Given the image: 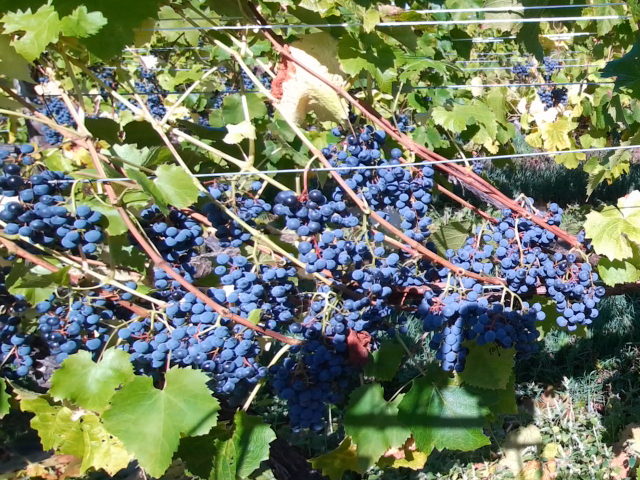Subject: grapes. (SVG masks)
<instances>
[{
	"mask_svg": "<svg viewBox=\"0 0 640 480\" xmlns=\"http://www.w3.org/2000/svg\"><path fill=\"white\" fill-rule=\"evenodd\" d=\"M154 291L167 297L166 312L176 327L172 333L162 321L153 325L155 335L148 339L138 338L129 345H118V350L129 352L130 361H149L151 366L164 365L168 351L173 362L184 365L197 364L211 378L209 388L217 395L230 393L245 378L255 384L268 374L265 365L254 357L260 352V345L252 329L237 323L233 327L235 335L228 334L226 325L215 328L203 340L204 329L217 320V311L193 292L181 289V285L161 269L153 268ZM218 353L216 354V355H214V356H213V358H208V356H207V355L212 354V353H214V352H216L217 350H219V351H218Z\"/></svg>",
	"mask_w": 640,
	"mask_h": 480,
	"instance_id": "1",
	"label": "grapes"
},
{
	"mask_svg": "<svg viewBox=\"0 0 640 480\" xmlns=\"http://www.w3.org/2000/svg\"><path fill=\"white\" fill-rule=\"evenodd\" d=\"M499 223L493 227V235L485 232L481 238L485 242L493 240L499 246L496 256L502 262L500 272L511 281L509 288L518 294L527 293L530 286L539 281V276H545L546 292L556 300V309L562 313L557 318V324L576 332L579 325H591L599 316V310L594 306L606 294L603 286L592 285L598 279V274L592 271L589 263L579 264L577 256L569 253L564 259L561 252L550 255L541 247L534 244H551L556 236L548 234L531 220L522 217L518 223L524 232L522 247L525 268H515L519 264L520 249L516 245H507L515 237L513 232V213L503 208L501 216L496 218ZM568 269L573 278L567 283L561 281Z\"/></svg>",
	"mask_w": 640,
	"mask_h": 480,
	"instance_id": "2",
	"label": "grapes"
},
{
	"mask_svg": "<svg viewBox=\"0 0 640 480\" xmlns=\"http://www.w3.org/2000/svg\"><path fill=\"white\" fill-rule=\"evenodd\" d=\"M460 283L470 292L465 295L466 300H459L461 295L453 293L443 300V312L433 315L428 308L434 295L432 290L422 292V301L419 313L425 317L423 320L426 332L435 331L442 324V332L429 339L432 350L438 359H442L441 367L444 370H462L468 359V349L460 345L463 339L476 340L480 345L490 343L495 338L506 350L514 348V342H520V347L526 352L538 351L540 344L535 339L540 337V332L535 322H543L545 313L540 302L529 305L522 304L524 312L511 311L509 306L503 308L500 301H493L489 305L486 298L477 295L484 291V285L478 283L475 278H462Z\"/></svg>",
	"mask_w": 640,
	"mask_h": 480,
	"instance_id": "3",
	"label": "grapes"
},
{
	"mask_svg": "<svg viewBox=\"0 0 640 480\" xmlns=\"http://www.w3.org/2000/svg\"><path fill=\"white\" fill-rule=\"evenodd\" d=\"M10 156L8 149L0 151V167H4V174L0 175V188L5 196H11L18 191V196L23 203L38 201L32 210H27L23 204L7 202L4 211L0 213V220L5 223V232L20 236H28L31 244H50L56 238L62 248L74 249L78 242L82 245L83 254H94L97 251L96 243L106 238V233L101 232L102 227L95 225L101 220L99 211H92L89 205H79L76 215L81 217L76 220L67 216L65 208H56L64 202L62 195H50L49 186L42 184V179L63 180V171H48L41 169L39 173H33L29 182L33 189L21 188V166L19 164H6Z\"/></svg>",
	"mask_w": 640,
	"mask_h": 480,
	"instance_id": "4",
	"label": "grapes"
},
{
	"mask_svg": "<svg viewBox=\"0 0 640 480\" xmlns=\"http://www.w3.org/2000/svg\"><path fill=\"white\" fill-rule=\"evenodd\" d=\"M345 194L339 186L330 194V199L322 192L313 188L309 191L308 199L300 204L291 190H284L272 199L273 207L264 198L246 199L243 196H236L234 202L238 205L236 214L242 219L249 221L258 214L268 211L277 216L284 214L285 227L289 231H297L299 237H308L312 234L324 233L317 241L321 251L320 257L316 253L310 252L314 248L311 240H302L298 244L299 260L305 263V270L309 273H316L325 269L335 271L339 265H349L351 261L360 265L362 257L367 251V246L363 240L348 241L343 238V232L334 229L326 232V222L333 225H345L346 227L357 226L360 218L347 210V205L342 201Z\"/></svg>",
	"mask_w": 640,
	"mask_h": 480,
	"instance_id": "5",
	"label": "grapes"
},
{
	"mask_svg": "<svg viewBox=\"0 0 640 480\" xmlns=\"http://www.w3.org/2000/svg\"><path fill=\"white\" fill-rule=\"evenodd\" d=\"M341 176H347L346 184L351 189L365 187L367 191H359L357 196L365 198L368 206L376 211L385 221H389L391 215L383 211V206L393 205L399 214L405 218L400 222L404 234L414 240L422 241L431 236L430 225L432 219L424 216L428 212V205L431 203V195L426 191L433 189L435 181L434 166L423 167L420 178L412 177L410 169H377L379 182L374 183L368 180L372 176L371 170H347L337 171ZM417 201L412 210L409 202L411 192Z\"/></svg>",
	"mask_w": 640,
	"mask_h": 480,
	"instance_id": "6",
	"label": "grapes"
},
{
	"mask_svg": "<svg viewBox=\"0 0 640 480\" xmlns=\"http://www.w3.org/2000/svg\"><path fill=\"white\" fill-rule=\"evenodd\" d=\"M375 269L369 268L366 272L360 268H355L351 273V279L354 282L359 281L361 287H357L355 292L359 295H365L368 290L372 294H376L378 299L374 306L370 307L363 314L360 310L371 303L369 297H363L358 302L351 298L344 300V306L349 310V314L335 311L333 317L327 324L326 333L332 337V348L336 352H345L348 349V332L354 330L360 332L362 329L374 331L378 322H381L386 315L394 312L392 306H382L383 302L391 295L393 289L386 285L382 287L384 282H392L395 286L401 287H424L426 278L416 274V267L401 264V257L396 253H388L384 259L378 261Z\"/></svg>",
	"mask_w": 640,
	"mask_h": 480,
	"instance_id": "7",
	"label": "grapes"
},
{
	"mask_svg": "<svg viewBox=\"0 0 640 480\" xmlns=\"http://www.w3.org/2000/svg\"><path fill=\"white\" fill-rule=\"evenodd\" d=\"M55 298L54 294H50L47 299L39 300L35 306V313L42 315L51 308V303ZM85 297L80 301H75L71 305V312H68L66 306H58L55 308L54 314L42 315L39 319L40 334L44 341L50 346V352L55 356L57 363H63L71 354H75L80 349L92 351V361L96 362L98 356L104 348L105 341L109 339L110 328L108 326H99L98 322L102 319H111L113 317L112 309H105L98 314L94 313V307H104L106 300L104 298H96L92 300V305H83L86 303ZM66 316L71 325L67 327V334L58 331L65 325ZM97 331L99 338L91 339L85 342L80 336L82 331Z\"/></svg>",
	"mask_w": 640,
	"mask_h": 480,
	"instance_id": "8",
	"label": "grapes"
},
{
	"mask_svg": "<svg viewBox=\"0 0 640 480\" xmlns=\"http://www.w3.org/2000/svg\"><path fill=\"white\" fill-rule=\"evenodd\" d=\"M230 262V256L227 253H221L216 258L219 265L214 269V273L220 277L222 285H234L235 292H230L227 296L225 289L211 288L208 296L219 304L226 303L227 307L240 314L248 317L253 309H262L264 315L259 319L261 324L274 330L276 322L279 320L291 321L295 317L292 308L286 307L284 301L287 298V292L293 288V284L289 281L282 285L271 284L268 287L267 299L261 298L265 291L262 284H255L258 276L255 273H244V267L248 264L245 256H233L231 258L232 265L237 269L230 271L226 265Z\"/></svg>",
	"mask_w": 640,
	"mask_h": 480,
	"instance_id": "9",
	"label": "grapes"
},
{
	"mask_svg": "<svg viewBox=\"0 0 640 480\" xmlns=\"http://www.w3.org/2000/svg\"><path fill=\"white\" fill-rule=\"evenodd\" d=\"M172 222L176 223L178 227L185 228L179 229L177 227H168L166 221H155L151 232L158 234L159 232L164 234L165 237L160 238L156 243L158 251L162 252V256L167 261L178 262L182 264L179 267H175L174 270L180 275L184 273V279L188 282H194V275L198 272V267L190 265V258L197 257L199 252L193 250L192 247H200L204 243L202 236L203 228L198 224L197 220L193 216H187L186 213L180 210H174L170 214Z\"/></svg>",
	"mask_w": 640,
	"mask_h": 480,
	"instance_id": "10",
	"label": "grapes"
},
{
	"mask_svg": "<svg viewBox=\"0 0 640 480\" xmlns=\"http://www.w3.org/2000/svg\"><path fill=\"white\" fill-rule=\"evenodd\" d=\"M386 131L384 129L376 130L373 124H366L363 132L356 134L350 133L347 136L349 153L346 150L338 151L336 146L329 143L324 146L321 151L325 156L330 155L329 161L335 166L345 165H367L380 157L379 146L385 144Z\"/></svg>",
	"mask_w": 640,
	"mask_h": 480,
	"instance_id": "11",
	"label": "grapes"
},
{
	"mask_svg": "<svg viewBox=\"0 0 640 480\" xmlns=\"http://www.w3.org/2000/svg\"><path fill=\"white\" fill-rule=\"evenodd\" d=\"M19 318L8 313L0 315V362H3L7 355L14 350L17 357L12 359L15 368L14 374L18 377H25L29 373V367L33 365V359L29 356L31 345L24 342V335L17 332Z\"/></svg>",
	"mask_w": 640,
	"mask_h": 480,
	"instance_id": "12",
	"label": "grapes"
},
{
	"mask_svg": "<svg viewBox=\"0 0 640 480\" xmlns=\"http://www.w3.org/2000/svg\"><path fill=\"white\" fill-rule=\"evenodd\" d=\"M201 213L207 215L211 228H217L214 236L220 238L219 244L223 247H242L244 242H247L252 237L250 232H244L241 225L235 221L230 224V229H228L226 227V221L230 217L214 202L203 203L201 205Z\"/></svg>",
	"mask_w": 640,
	"mask_h": 480,
	"instance_id": "13",
	"label": "grapes"
},
{
	"mask_svg": "<svg viewBox=\"0 0 640 480\" xmlns=\"http://www.w3.org/2000/svg\"><path fill=\"white\" fill-rule=\"evenodd\" d=\"M475 242L473 237H469L464 246L458 251V256L454 255V250L449 248L445 251V256L450 262L458 264L464 268H472L473 271L489 274L494 269L492 262L479 263V260L488 259L494 252L495 247L492 244H486L482 251L477 250L472 244Z\"/></svg>",
	"mask_w": 640,
	"mask_h": 480,
	"instance_id": "14",
	"label": "grapes"
},
{
	"mask_svg": "<svg viewBox=\"0 0 640 480\" xmlns=\"http://www.w3.org/2000/svg\"><path fill=\"white\" fill-rule=\"evenodd\" d=\"M326 305L327 302L324 299L314 300L302 323L292 322L288 326V332L290 334H302L306 340L313 341L317 336V332L323 329V323L318 321L316 316Z\"/></svg>",
	"mask_w": 640,
	"mask_h": 480,
	"instance_id": "15",
	"label": "grapes"
},
{
	"mask_svg": "<svg viewBox=\"0 0 640 480\" xmlns=\"http://www.w3.org/2000/svg\"><path fill=\"white\" fill-rule=\"evenodd\" d=\"M136 318V314L132 313L130 315V319L134 320ZM151 323L150 319H142L130 321L126 326H121L117 330V336L121 340H126L130 337L140 336L145 331L146 325Z\"/></svg>",
	"mask_w": 640,
	"mask_h": 480,
	"instance_id": "16",
	"label": "grapes"
},
{
	"mask_svg": "<svg viewBox=\"0 0 640 480\" xmlns=\"http://www.w3.org/2000/svg\"><path fill=\"white\" fill-rule=\"evenodd\" d=\"M260 272L262 273L261 275L262 281L264 283H267L271 279H274L275 281H279L285 278L294 277L297 274V269L295 267L273 268L270 264H262L260 266Z\"/></svg>",
	"mask_w": 640,
	"mask_h": 480,
	"instance_id": "17",
	"label": "grapes"
},
{
	"mask_svg": "<svg viewBox=\"0 0 640 480\" xmlns=\"http://www.w3.org/2000/svg\"><path fill=\"white\" fill-rule=\"evenodd\" d=\"M547 205L549 206L550 216L546 219V222L549 225L559 224L562 220L561 215L564 213V210L557 202H553L552 200H549Z\"/></svg>",
	"mask_w": 640,
	"mask_h": 480,
	"instance_id": "18",
	"label": "grapes"
},
{
	"mask_svg": "<svg viewBox=\"0 0 640 480\" xmlns=\"http://www.w3.org/2000/svg\"><path fill=\"white\" fill-rule=\"evenodd\" d=\"M216 195L221 196V193H231L233 191V186L229 183H209L207 185Z\"/></svg>",
	"mask_w": 640,
	"mask_h": 480,
	"instance_id": "19",
	"label": "grapes"
},
{
	"mask_svg": "<svg viewBox=\"0 0 640 480\" xmlns=\"http://www.w3.org/2000/svg\"><path fill=\"white\" fill-rule=\"evenodd\" d=\"M159 213V208L155 204H150L147 207L143 208L141 211V216L145 220H150L153 217L157 216Z\"/></svg>",
	"mask_w": 640,
	"mask_h": 480,
	"instance_id": "20",
	"label": "grapes"
},
{
	"mask_svg": "<svg viewBox=\"0 0 640 480\" xmlns=\"http://www.w3.org/2000/svg\"><path fill=\"white\" fill-rule=\"evenodd\" d=\"M390 155L392 158L388 159H382L380 161V164H395V163H401L400 158L403 155V152L399 149V148H393L390 151Z\"/></svg>",
	"mask_w": 640,
	"mask_h": 480,
	"instance_id": "21",
	"label": "grapes"
}]
</instances>
